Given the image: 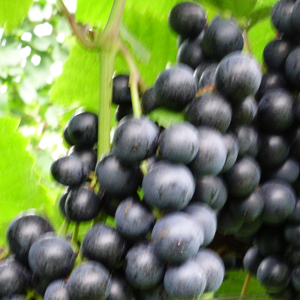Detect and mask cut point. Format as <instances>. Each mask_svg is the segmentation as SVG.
Wrapping results in <instances>:
<instances>
[{
    "label": "cut point",
    "mask_w": 300,
    "mask_h": 300,
    "mask_svg": "<svg viewBox=\"0 0 300 300\" xmlns=\"http://www.w3.org/2000/svg\"><path fill=\"white\" fill-rule=\"evenodd\" d=\"M116 48L121 50L127 66L130 69L129 85L131 86V96L133 101V113H141V106L138 97V80L140 73L131 52L126 45L121 41L120 36L116 35L115 38Z\"/></svg>",
    "instance_id": "6a23745f"
}]
</instances>
